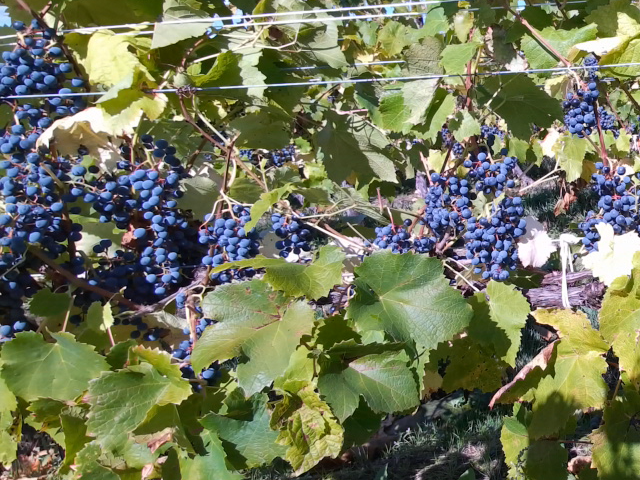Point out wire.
Masks as SVG:
<instances>
[{
	"instance_id": "wire-1",
	"label": "wire",
	"mask_w": 640,
	"mask_h": 480,
	"mask_svg": "<svg viewBox=\"0 0 640 480\" xmlns=\"http://www.w3.org/2000/svg\"><path fill=\"white\" fill-rule=\"evenodd\" d=\"M454 0H424L408 3H388L375 4L361 7H337L324 8L316 10H302L282 13H253L244 17H217V18H199L191 20H180L171 22H118L110 24H101L96 26L71 27L68 29H59V34H70L73 32L98 31L103 29H112L120 27H173L182 25H193L201 23H219V22H243V23H225L221 25H212V30H223L227 28H245L249 26H258L264 24H285V23H304L315 22L319 20H340L354 18H414L419 16H434V11H417L412 13H352L338 15H318L337 12H363L377 9L390 8H410L426 5H440L453 3Z\"/></svg>"
},
{
	"instance_id": "wire-2",
	"label": "wire",
	"mask_w": 640,
	"mask_h": 480,
	"mask_svg": "<svg viewBox=\"0 0 640 480\" xmlns=\"http://www.w3.org/2000/svg\"><path fill=\"white\" fill-rule=\"evenodd\" d=\"M622 66H640V61H620V62H594L586 64H572L555 67H546L536 70H509V71H491V72H474V73H437L434 75H399L388 77H356L346 79L327 80L323 82H294V83H268L257 85H219V86H185L169 89H151L146 88L145 92L149 94H171L187 91H221V90H259L270 88H302V87H325L329 85L348 84L358 82H390L401 80H436L439 78H476L493 76H511V75H538L548 72H557L574 69H588L596 67H622Z\"/></svg>"
},
{
	"instance_id": "wire-3",
	"label": "wire",
	"mask_w": 640,
	"mask_h": 480,
	"mask_svg": "<svg viewBox=\"0 0 640 480\" xmlns=\"http://www.w3.org/2000/svg\"><path fill=\"white\" fill-rule=\"evenodd\" d=\"M104 91H89V92H65V93H37L25 96L19 95H0V100H17L28 101L39 98H67V97H91V96H104Z\"/></svg>"
}]
</instances>
